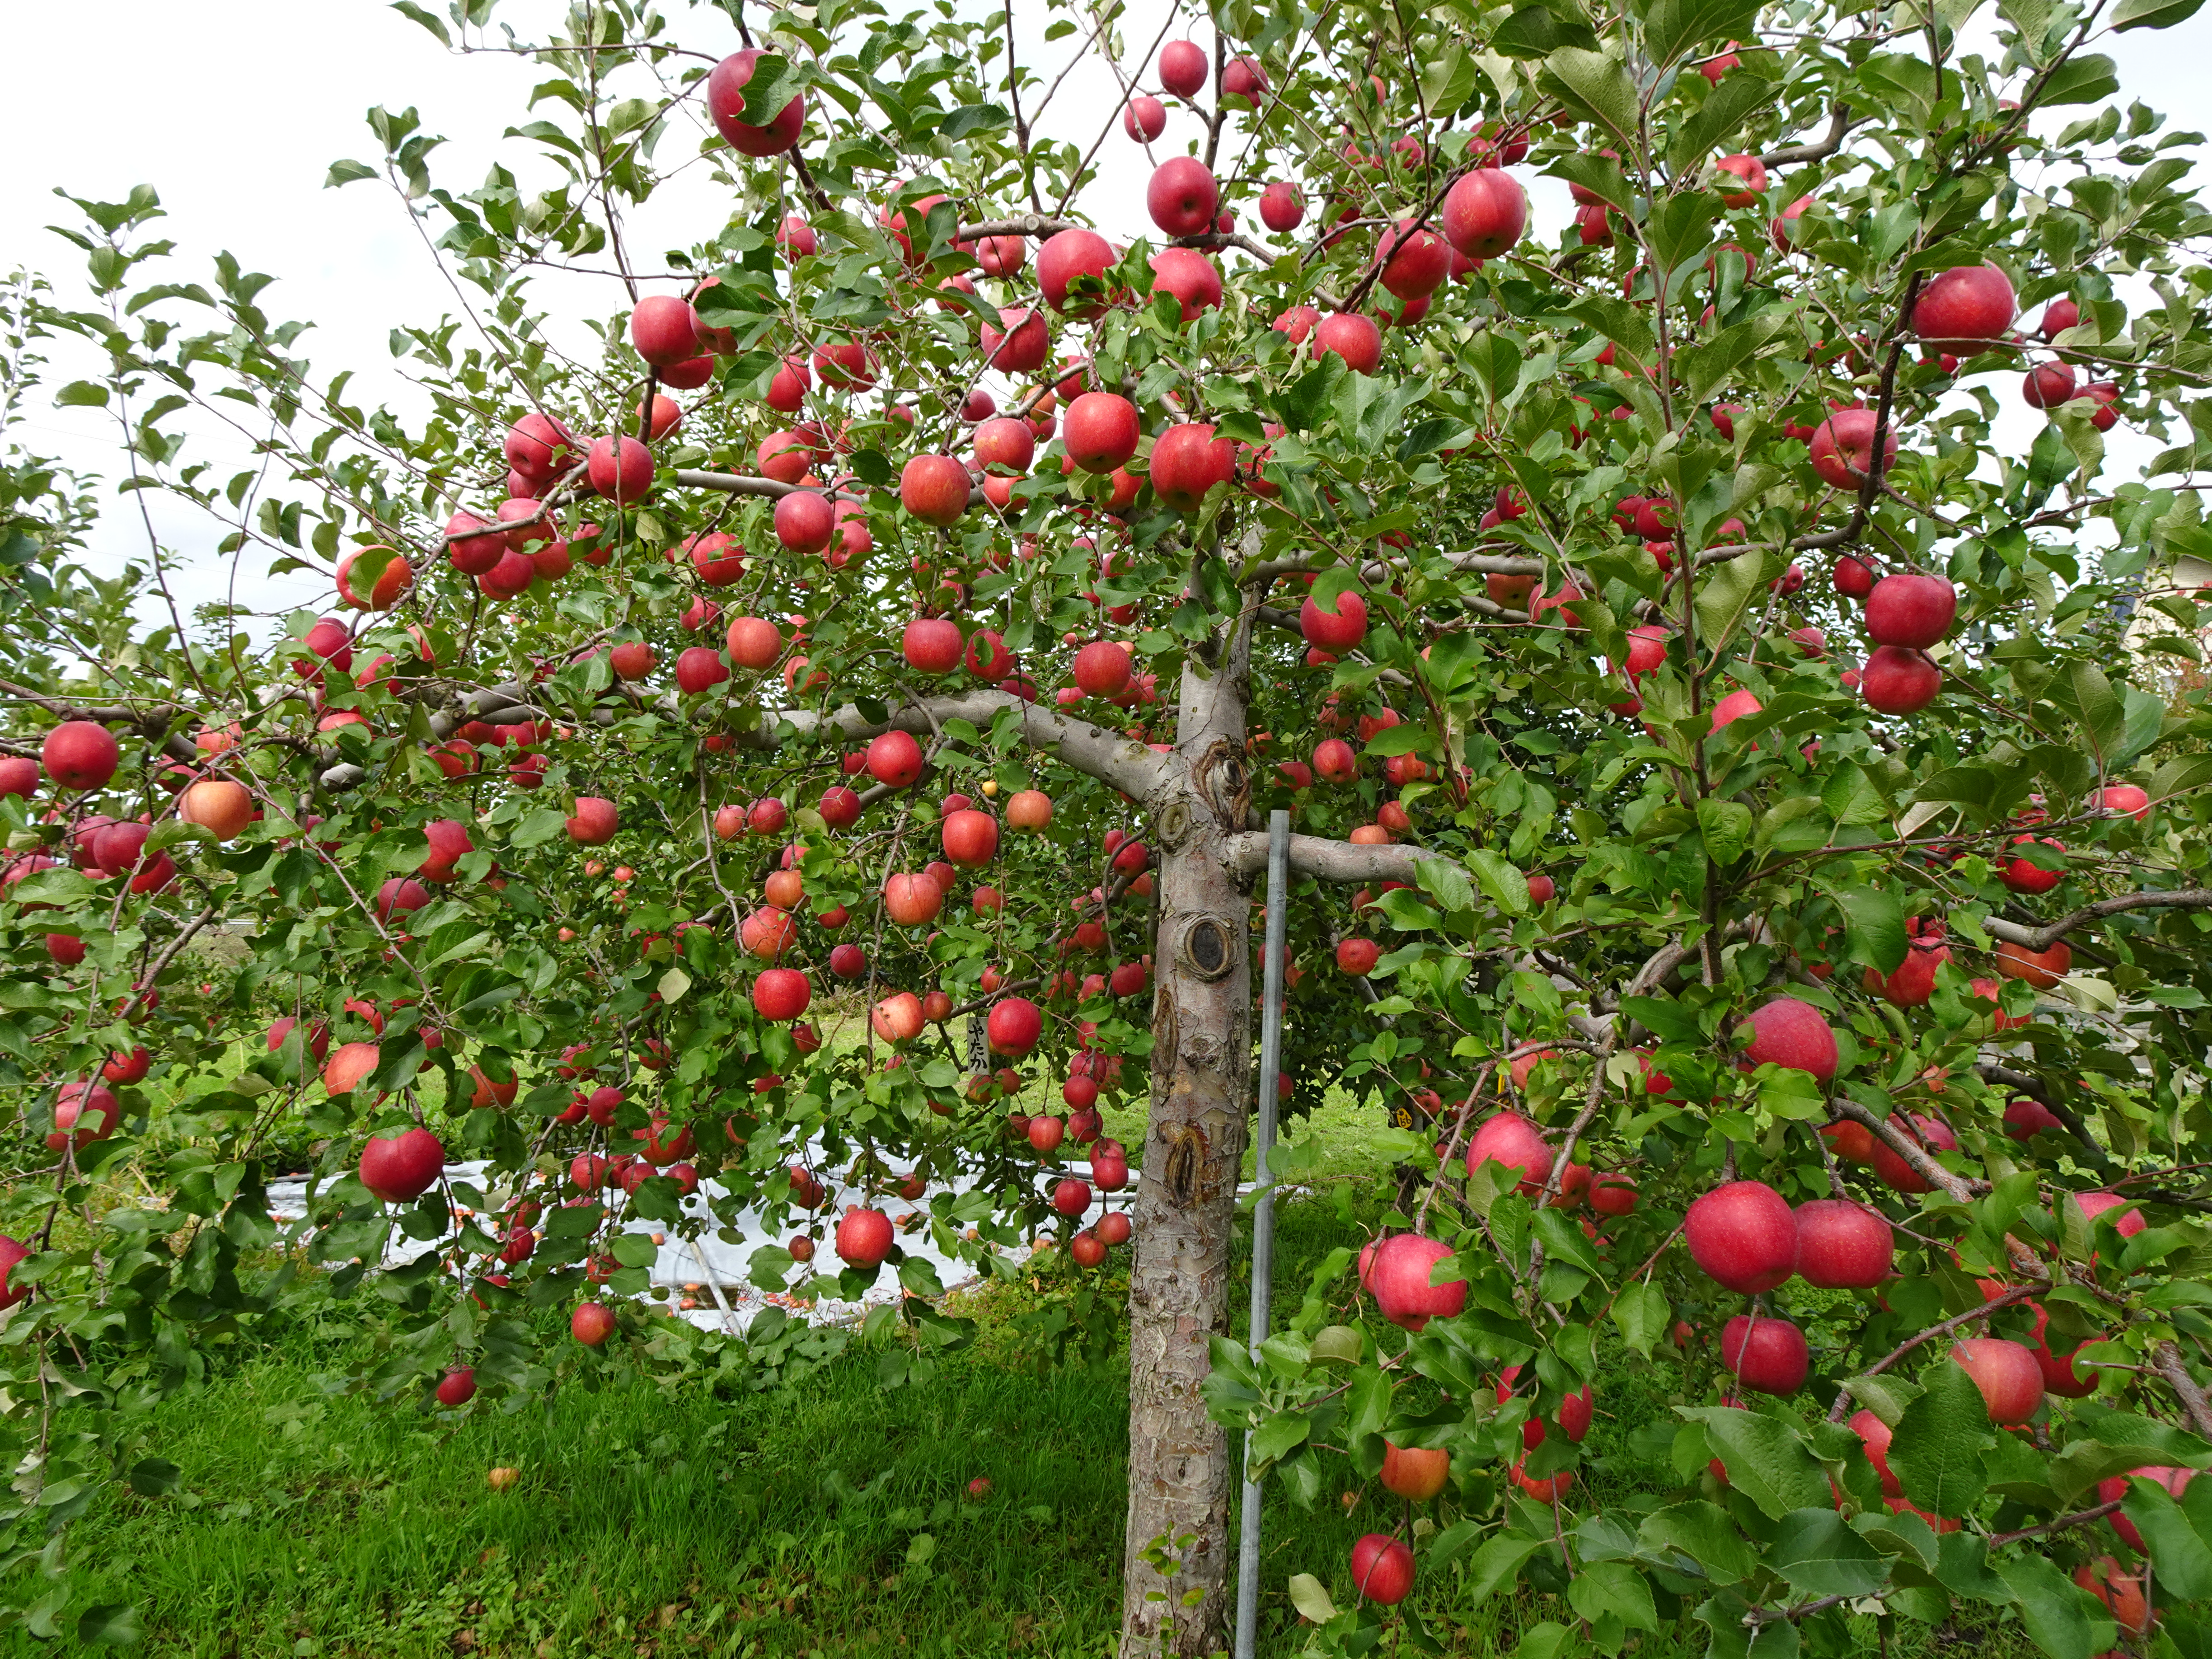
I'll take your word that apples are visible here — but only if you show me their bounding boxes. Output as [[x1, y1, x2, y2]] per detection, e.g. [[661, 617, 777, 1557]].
[[1941, 1235, 2028, 1311], [1497, 479, 1553, 532], [820, 787, 863, 831], [1253, 904, 1287, 931], [1863, 572, 1957, 651], [1585, 494, 1648, 540], [1028, 1114, 1065, 1153], [1533, 1140, 1594, 1212], [1019, 383, 1057, 422], [741, 905, 800, 964], [1119, 869, 1159, 903], [1195, 208, 1235, 256], [1274, 680, 1292, 696], [921, 990, 954, 1024], [1419, 645, 1476, 695], [559, 1195, 601, 1241], [405, 625, 454, 654], [1568, 147, 1622, 209], [1220, 57, 1269, 111], [505, 1196, 542, 1229], [2005, 792, 2054, 836], [1770, 297, 1802, 324], [1646, 345, 1680, 388], [660, 1162, 700, 1197], [898, 1171, 927, 1203], [2074, 1546, 2164, 1643], [949, 231, 978, 277], [1878, 1271, 1919, 1315], [1890, 1051, 1955, 1108], [470, 1274, 510, 1312], [1863, 937, 1955, 1010], [553, 1089, 590, 1129], [566, 433, 602, 492], [1076, 1018, 1115, 1052], [1253, 1072, 1294, 1106], [967, 1073, 994, 1103], [1637, 497, 1684, 543], [478, 565, 522, 603], [752, 967, 811, 1023], [1850, 1479, 1967, 1563], [1089, 1137, 1126, 1171], [1816, 650, 1862, 703], [911, 587, 943, 616], [724, 1111, 764, 1147], [2042, 1191, 2153, 1283], [154, 753, 216, 801], [1095, 287, 1159, 336], [314, 679, 366, 721], [1587, 1172, 1641, 1218], [1914, 357, 1960, 398], [466, 1210, 478, 1221], [875, 177, 960, 277], [1005, 1109, 1034, 1143], [630, 294, 700, 367], [940, 793, 981, 834], [508, 752, 552, 790], [510, 611, 522, 626], [1825, 396, 1868, 430], [557, 925, 580, 946], [815, 894, 853, 931], [5, 854, 65, 910], [1300, 588, 1367, 653], [569, 651, 607, 692], [837, 745, 874, 778], [707, 46, 805, 157], [2002, 1101, 2066, 1155], [1574, 201, 1628, 253], [610, 887, 634, 906], [376, 878, 436, 930], [1510, 1039, 1580, 1094], [1005, 789, 1052, 836], [571, 1303, 616, 1347], [2041, 295, 2102, 352], [504, 412, 575, 480], [470, 849, 501, 886], [761, 353, 811, 412], [981, 304, 1050, 374], [42, 720, 119, 792], [629, 1108, 689, 1168], [334, 543, 415, 613], [1510, 1446, 1574, 1510], [1240, 421, 1306, 497], [2075, 1650, 2136, 1659], [1805, 322, 1854, 371], [1051, 934, 1083, 965], [988, 999, 1043, 1058], [1255, 990, 1287, 1021], [877, 401, 913, 441], [788, 1021, 823, 1055], [792, 547, 834, 590], [1374, 279, 1432, 329], [746, 796, 787, 837], [589, 431, 655, 503], [795, 1179, 827, 1212], [584, 857, 607, 878], [944, 568, 969, 589], [910, 554, 932, 576], [1104, 551, 1150, 588], [708, 449, 749, 490], [1068, 1109, 1104, 1144], [1619, 1046, 1707, 1116], [1061, 619, 1091, 646], [462, 1061, 519, 1113], [927, 932, 946, 951], [1146, 156, 1219, 238], [963, 458, 990, 489], [1110, 500, 1138, 534], [1069, 1051, 1107, 1088], [1272, 758, 1312, 799], [939, 578, 964, 604], [787, 1233, 818, 1265], [1081, 577, 1117, 605], [1731, 999, 1838, 1090], [1139, 625, 1157, 641], [1067, 537, 1106, 575], [773, 489, 836, 554], [1073, 643, 1130, 699], [888, 276, 931, 311], [866, 730, 923, 789], [689, 273, 771, 357], [1095, 1212, 1132, 1249], [1443, 238, 1487, 288], [1517, 869, 1555, 905], [1070, 894, 1095, 916], [269, 863, 307, 900], [1486, 556, 1541, 611], [75, 864, 119, 892], [1373, 1234, 1468, 1334], [1149, 741, 1174, 769], [1139, 247, 1220, 335], [1246, 301, 1275, 333], [1371, 218, 1455, 303], [1385, 758, 1418, 787], [0, 1232, 41, 1315], [994, 670, 1039, 704], [1465, 1109, 1553, 1205], [764, 869, 813, 910], [943, 810, 999, 871], [486, 548, 534, 595], [1699, 53, 1740, 99], [680, 592, 723, 634], [1605, 682, 1645, 717], [1287, 959, 1320, 992], [928, 1091, 955, 1119], [1763, 190, 1829, 256], [1126, 731, 1147, 747], [693, 530, 748, 588], [1133, 674, 1164, 711], [900, 453, 971, 528], [782, 839, 820, 875], [1643, 700, 1681, 740], [609, 642, 657, 681], [614, 864, 637, 887], [478, 1252, 495, 1265], [1343, 73, 1385, 110], [1704, 1395, 1751, 1437], [830, 943, 865, 978], [1402, 749, 1439, 778], [1441, 167, 1525, 259], [1808, 407, 1899, 493], [363, 814, 383, 837], [441, 511, 508, 576], [713, 802, 750, 842], [1797, 742, 1837, 778], [881, 1053, 917, 1081], [1376, 799, 1417, 839], [849, 345, 882, 394], [454, 1207, 465, 1218], [1016, 539, 1046, 565], [1312, 738, 1358, 785], [1306, 639, 1346, 671], [835, 419, 862, 454], [45, 917, 93, 967], [725, 615, 782, 671], [1256, 939, 1292, 976], [1705, 687, 1792, 764], [93, 821, 165, 877], [1788, 1197, 1895, 1291], [902, 617, 962, 675], [1705, 38, 1749, 73], [1317, 700, 1352, 733], [1057, 684, 1087, 717], [1563, 335, 1616, 383], [357, 653, 407, 699], [527, 534, 575, 583], [1351, 1532, 1419, 1604], [1704, 1060, 1759, 1110], [781, 1164, 809, 1200], [267, 1012, 329, 1068], [594, 1009, 623, 1039], [823, 519, 873, 575], [2096, 1437, 2212, 1562], [756, 430, 811, 484], [100, 1041, 151, 1088], [359, 1121, 447, 1206], [1051, 354, 1103, 404], [993, 1067, 1022, 1097], [772, 215, 818, 267], [1623, 266, 1669, 311], [675, 646, 732, 701], [1785, 503, 1824, 535], [1338, 937, 1379, 980], [585, 1250, 628, 1285], [316, 712, 372, 757], [583, 960, 605, 982], [1041, 968, 1077, 1008], [1079, 973, 1112, 1002], [1606, 625, 1680, 695], [1260, 182, 1305, 233], [403, 1023, 444, 1073], [985, 473, 1031, 515], [136, 808, 159, 827], [1787, 628, 1826, 663], [1591, 371, 1641, 422], [753, 1068, 788, 1103], [1374, 130, 1421, 175], [41, 1082, 120, 1155], [494, 1225, 534, 1266], [436, 1260, 452, 1273], [112, 980, 160, 1026], [973, 886, 1008, 917], [1945, 1337, 2045, 1429], [1022, 408, 1057, 445], [1357, 1240, 1409, 1296], [291, 622, 353, 687], [1112, 836, 1150, 879], [1333, 189, 1366, 224], [2066, 381, 2123, 434], [1431, 1146, 1457, 1170], [964, 627, 1019, 683], [700, 725, 740, 758], [1999, 1294, 2111, 1399], [632, 983, 672, 1017], [978, 229, 1027, 279], [488, 723, 534, 766], [979, 964, 1014, 1000], [972, 421, 1038, 483], [1399, 1058, 1433, 1083], [1136, 361, 1159, 384], [1124, 97, 1167, 144], [1273, 304, 1323, 367], [38, 798, 68, 828], [194, 715, 256, 771], [1358, 706, 1401, 745], [1281, 554, 1306, 584], [885, 872, 943, 928], [1575, 1212, 1632, 1262], [188, 780, 253, 841], [454, 1217, 465, 1229], [1965, 99, 2031, 157], [638, 1039, 671, 1070], [925, 861, 956, 895], [1103, 829, 1133, 856], [654, 342, 715, 391], [830, 498, 867, 536], [1787, 924, 1845, 982], [1525, 577, 1586, 636], [294, 814, 331, 855], [1172, 585, 1201, 618], [431, 1363, 480, 1408], [201, 977, 240, 1010], [1350, 824, 1388, 855], [554, 1043, 607, 1084], [1707, 1444, 1758, 1487], [1071, 1229, 1106, 1270], [1846, 330, 1899, 378], [1061, 450, 1144, 508], [1477, 504, 1528, 551], [413, 816, 481, 885], [1063, 1073, 1100, 1112], [1496, 1357, 1592, 1455], [634, 392, 682, 443], [1922, 835, 1979, 885], [1832, 553, 1884, 601], [1376, 1423, 1450, 1503], [1546, 94, 1585, 130], [836, 1209, 895, 1270], [1815, 1104, 1888, 1167], [1700, 516, 1746, 559], [628, 923, 669, 961], [1699, 304, 1733, 338], [424, 741, 481, 786], [603, 1154, 636, 1190], [1342, 133, 1383, 182], [587, 1087, 629, 1127], [1108, 962, 1147, 996], [1148, 422, 1236, 512], [1341, 1490, 1363, 1512], [1062, 393, 1139, 472], [1961, 977, 2033, 1041], [1090, 884, 1118, 907], [2023, 360, 2076, 410], [783, 653, 830, 698], [1699, 155, 1767, 214], [1447, 1097, 1476, 1124], [2072, 1079, 2093, 1101], [1075, 919, 1111, 950], [1159, 383, 1191, 413], [538, 1164, 551, 1182], [1090, 1158, 1130, 1194], [1907, 252, 2015, 358], [1054, 1179, 1093, 1217], [981, 778, 1000, 798], [1410, 1088, 1441, 1118], [0, 751, 39, 806], [1720, 1313, 1810, 1397], [1307, 475, 1360, 512], [531, 660, 559, 688], [1434, 760, 1482, 803], [379, 933, 418, 964], [1107, 678, 1144, 710], [1643, 538, 1681, 575], [784, 610, 817, 650], [573, 521, 622, 566], [973, 537, 1014, 566], [663, 531, 705, 568], [674, 920, 716, 958], [1557, 393, 1606, 450], [1441, 422, 1499, 467], [961, 388, 997, 425], [1672, 1316, 1717, 1354], [1683, 1180, 1801, 1295], [796, 418, 840, 460], [1763, 562, 1804, 599], [1352, 889, 1395, 923], [342, 987, 417, 1044], [516, 716, 554, 744], [564, 795, 620, 847], [570, 1150, 614, 1194], [130, 850, 183, 906], [833, 471, 870, 497], [1702, 241, 1756, 297], [936, 275, 974, 317], [869, 990, 924, 1046], [1067, 486, 1106, 528], [1377, 517, 1418, 554], [1992, 928, 2073, 991], [508, 463, 558, 507], [1778, 405, 1815, 449], [1379, 874, 1428, 897], [324, 1041, 396, 1115], [1871, 1114, 1959, 1195], [453, 712, 496, 749], [1996, 834, 2070, 895], [1845, 1406, 1927, 1500], [814, 332, 866, 390], [63, 815, 120, 870], [1709, 403, 1752, 444], [1900, 904, 1948, 951], [1863, 641, 1944, 717], [1464, 139, 1503, 178], [1038, 228, 1120, 323], [1158, 40, 1207, 98], [1244, 732, 1275, 758], [1311, 311, 1380, 381], [250, 807, 294, 855], [495, 498, 561, 554], [1468, 121, 1533, 165], [967, 567, 994, 588], [2089, 786, 2151, 836], [1107, 595, 1144, 623], [786, 471, 821, 496], [1324, 218, 1367, 273]]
